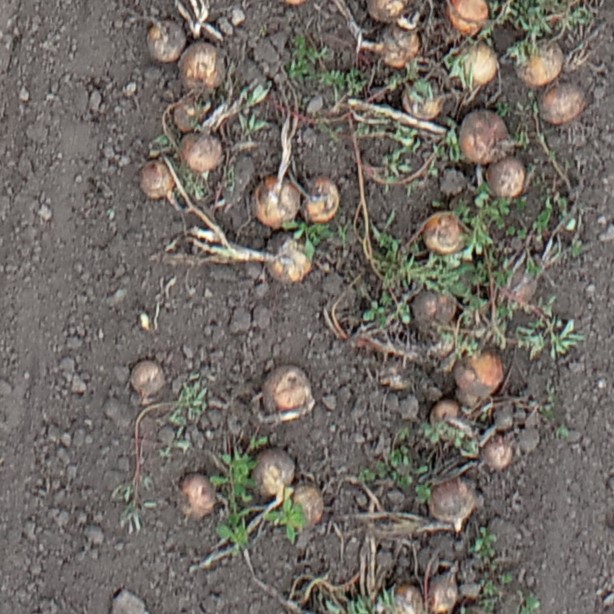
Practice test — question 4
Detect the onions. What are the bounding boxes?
[366,0,408,20]
[250,449,295,497]
[483,158,526,198]
[390,584,423,613]
[451,45,497,86]
[431,397,460,425]
[299,178,338,220]
[423,213,462,255]
[424,574,459,610]
[181,134,222,170]
[403,81,445,119]
[176,472,215,518]
[512,41,562,84]
[376,28,417,66]
[126,360,163,397]
[432,476,475,518]
[136,159,173,197]
[407,290,455,331]
[267,236,309,281]
[264,365,310,415]
[541,82,587,122]
[171,93,211,130]
[445,0,487,35]
[482,435,514,469]
[148,19,185,59]
[454,347,504,401]
[178,45,220,86]
[286,484,324,527]
[456,111,508,161]
[252,179,299,226]
[498,271,534,310]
